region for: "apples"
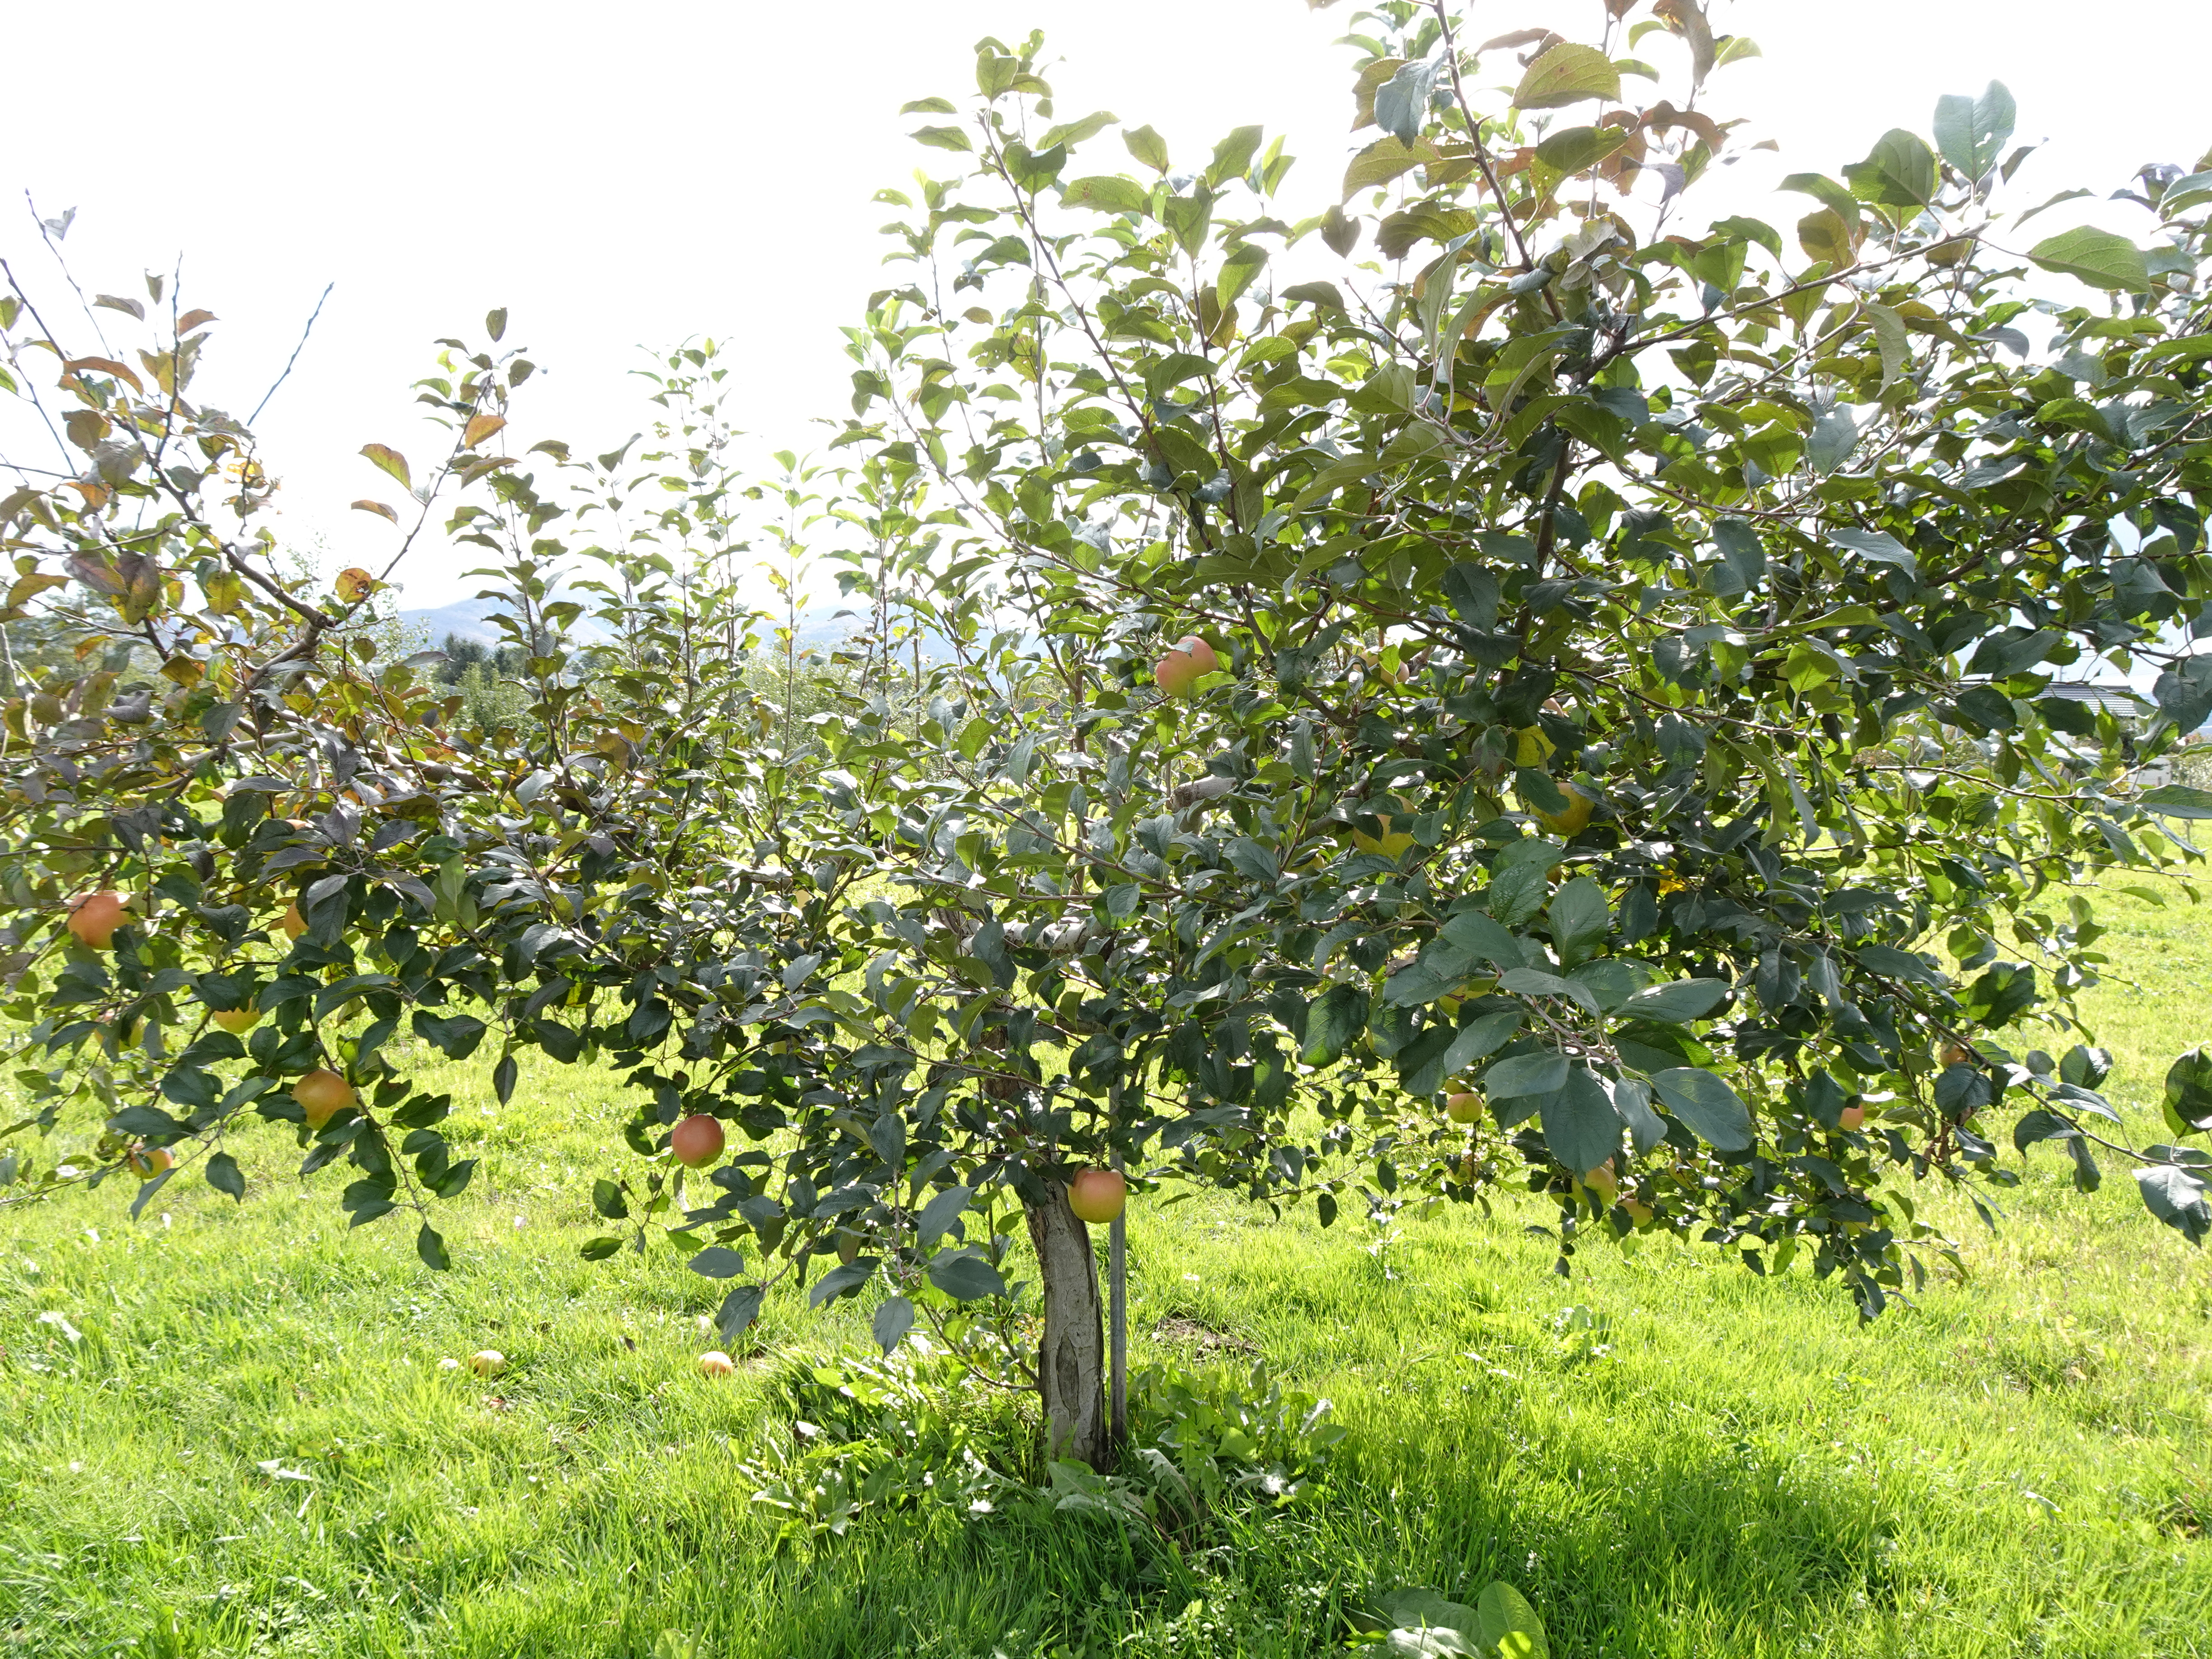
[1522,689,1568,741]
[1155,633,1220,702]
[1641,668,1700,714]
[1445,1066,1482,1096]
[213,983,271,1036]
[66,888,143,952]
[1822,1089,1868,1136]
[1447,1149,1482,1185]
[1533,777,1602,835]
[289,1065,358,1134]
[1501,712,1558,766]
[1572,1166,1614,1208]
[1354,792,1421,864]
[1582,926,1610,958]
[1586,1155,1620,1192]
[283,894,336,949]
[625,860,667,900]
[373,776,417,816]
[129,1140,172,1179]
[323,777,361,816]
[1444,1093,1484,1125]
[778,882,811,945]
[1939,1030,1977,1077]
[1669,1143,1714,1191]
[671,1113,727,1171]
[93,1005,147,1053]
[1068,1163,1127,1223]
[697,864,739,898]
[1353,645,1411,692]
[535,864,583,913]
[1610,1188,1659,1228]
[272,816,330,879]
